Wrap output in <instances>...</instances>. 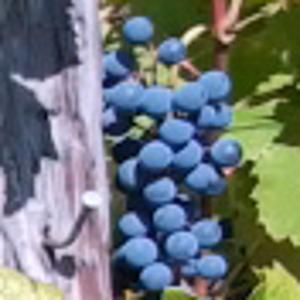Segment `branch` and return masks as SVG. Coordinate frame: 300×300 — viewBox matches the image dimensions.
<instances>
[{"instance_id": "branch-1", "label": "branch", "mask_w": 300, "mask_h": 300, "mask_svg": "<svg viewBox=\"0 0 300 300\" xmlns=\"http://www.w3.org/2000/svg\"><path fill=\"white\" fill-rule=\"evenodd\" d=\"M212 24L213 27L211 28V33L215 40L213 63L221 70L228 71L232 67L228 0L212 1Z\"/></svg>"}]
</instances>
